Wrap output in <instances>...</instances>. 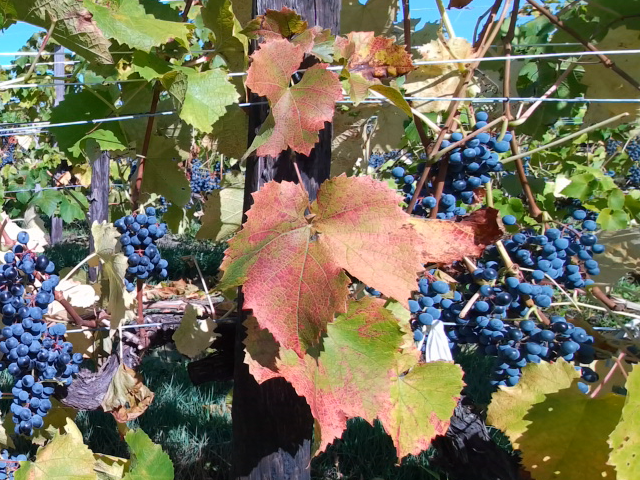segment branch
Segmentation results:
<instances>
[{
    "mask_svg": "<svg viewBox=\"0 0 640 480\" xmlns=\"http://www.w3.org/2000/svg\"><path fill=\"white\" fill-rule=\"evenodd\" d=\"M502 113L506 117L507 129L512 133V137H513V140L510 142L511 152L514 155H517L519 153L518 142L516 141V134H515L514 123H513V114L510 112L509 103H502Z\"/></svg>",
    "mask_w": 640,
    "mask_h": 480,
    "instance_id": "9",
    "label": "branch"
},
{
    "mask_svg": "<svg viewBox=\"0 0 640 480\" xmlns=\"http://www.w3.org/2000/svg\"><path fill=\"white\" fill-rule=\"evenodd\" d=\"M508 6H509V1L508 0H503L502 4H501V8H500V12L496 21L495 26L493 27V30L490 32L488 39L485 43V45L481 48V50L479 51V53L477 54V56H485L486 53L490 50V48L492 47L496 36L498 35V33L500 32V29L503 26L507 11H508Z\"/></svg>",
    "mask_w": 640,
    "mask_h": 480,
    "instance_id": "5",
    "label": "branch"
},
{
    "mask_svg": "<svg viewBox=\"0 0 640 480\" xmlns=\"http://www.w3.org/2000/svg\"><path fill=\"white\" fill-rule=\"evenodd\" d=\"M467 120L469 122V126L474 128L476 126V119L474 117L473 107L471 105H467L465 107Z\"/></svg>",
    "mask_w": 640,
    "mask_h": 480,
    "instance_id": "15",
    "label": "branch"
},
{
    "mask_svg": "<svg viewBox=\"0 0 640 480\" xmlns=\"http://www.w3.org/2000/svg\"><path fill=\"white\" fill-rule=\"evenodd\" d=\"M496 250L499 253L500 257L502 258V260L506 263V265L508 266L509 270L511 271L512 275L518 280V281H522L524 279V276L519 272L518 268L516 267V265L513 263V261L510 259V257L507 255V252L505 251L504 247H503V242L501 240H498L496 242Z\"/></svg>",
    "mask_w": 640,
    "mask_h": 480,
    "instance_id": "10",
    "label": "branch"
},
{
    "mask_svg": "<svg viewBox=\"0 0 640 480\" xmlns=\"http://www.w3.org/2000/svg\"><path fill=\"white\" fill-rule=\"evenodd\" d=\"M459 108V104L455 101H453V104L448 108L447 112L445 113V119L443 121V123L441 124L439 133L436 136L435 142L434 144L430 147L429 151H428V155H427V159L425 161L424 164V169L422 171V174L420 175L417 184L415 186L414 192L411 196V198L409 199L406 208H405V212L407 214H410L414 208V205L416 204L418 198L421 195V191L424 187V184L427 180V178L429 177V173L431 171V166L434 162V158H435V154L437 152V150L441 147V144L443 142V139L447 133V129L450 126L453 116L456 113V111Z\"/></svg>",
    "mask_w": 640,
    "mask_h": 480,
    "instance_id": "1",
    "label": "branch"
},
{
    "mask_svg": "<svg viewBox=\"0 0 640 480\" xmlns=\"http://www.w3.org/2000/svg\"><path fill=\"white\" fill-rule=\"evenodd\" d=\"M599 59L608 67H610L618 76L622 77L623 79L627 80L629 83H631L633 85V87L640 91V83L638 82V80L632 76L630 73L625 72L624 70H622L614 61H612L611 59H609L607 56H605L604 54H601L599 56Z\"/></svg>",
    "mask_w": 640,
    "mask_h": 480,
    "instance_id": "8",
    "label": "branch"
},
{
    "mask_svg": "<svg viewBox=\"0 0 640 480\" xmlns=\"http://www.w3.org/2000/svg\"><path fill=\"white\" fill-rule=\"evenodd\" d=\"M526 2L530 5L536 7V9L552 24L560 27L566 34L573 37L576 41H578L581 45H583L588 51H592L598 49L596 45L591 44L586 38L581 36L577 31L570 28L563 20L556 18L553 16L539 0H526Z\"/></svg>",
    "mask_w": 640,
    "mask_h": 480,
    "instance_id": "3",
    "label": "branch"
},
{
    "mask_svg": "<svg viewBox=\"0 0 640 480\" xmlns=\"http://www.w3.org/2000/svg\"><path fill=\"white\" fill-rule=\"evenodd\" d=\"M160 97H161V89L159 87H156L154 89V95H153L152 103H151V105L149 107V110L151 112L157 110V107L159 106V102H160Z\"/></svg>",
    "mask_w": 640,
    "mask_h": 480,
    "instance_id": "14",
    "label": "branch"
},
{
    "mask_svg": "<svg viewBox=\"0 0 640 480\" xmlns=\"http://www.w3.org/2000/svg\"><path fill=\"white\" fill-rule=\"evenodd\" d=\"M523 301L528 306L529 310L532 313H534L545 326H548L550 324V320L546 317V315L538 307L535 306L534 302L532 301V299L528 295H525L523 297Z\"/></svg>",
    "mask_w": 640,
    "mask_h": 480,
    "instance_id": "13",
    "label": "branch"
},
{
    "mask_svg": "<svg viewBox=\"0 0 640 480\" xmlns=\"http://www.w3.org/2000/svg\"><path fill=\"white\" fill-rule=\"evenodd\" d=\"M516 169H517V172H518L520 185H521L522 189L525 191V194H526V196L528 198L532 213L536 218H540L542 216V213L539 210V207L537 205V201L535 199L534 193H533L532 189L528 185L527 178H526V175H525V170L523 168V161L521 159H518L516 161Z\"/></svg>",
    "mask_w": 640,
    "mask_h": 480,
    "instance_id": "4",
    "label": "branch"
},
{
    "mask_svg": "<svg viewBox=\"0 0 640 480\" xmlns=\"http://www.w3.org/2000/svg\"><path fill=\"white\" fill-rule=\"evenodd\" d=\"M436 7H437V11L439 13V16L441 18V22L443 24L444 29L446 30L448 36L450 38H453L455 36V31L453 30V27L451 26L449 19H448V15L446 13V10L444 8V2L442 0H438L436 2Z\"/></svg>",
    "mask_w": 640,
    "mask_h": 480,
    "instance_id": "11",
    "label": "branch"
},
{
    "mask_svg": "<svg viewBox=\"0 0 640 480\" xmlns=\"http://www.w3.org/2000/svg\"><path fill=\"white\" fill-rule=\"evenodd\" d=\"M153 124H154V118L153 117L147 118L146 129H145L144 138H143L138 165H137V174H136V181L134 185L133 198L131 202V213L133 215H136L138 213V204L140 201L141 188L143 184L145 162H146L147 153H148V149L151 141Z\"/></svg>",
    "mask_w": 640,
    "mask_h": 480,
    "instance_id": "2",
    "label": "branch"
},
{
    "mask_svg": "<svg viewBox=\"0 0 640 480\" xmlns=\"http://www.w3.org/2000/svg\"><path fill=\"white\" fill-rule=\"evenodd\" d=\"M520 4H521V0H514L512 4L510 24L507 31L505 46H504V54L506 56L511 54L512 42H513V38H514L516 26H517V17H518Z\"/></svg>",
    "mask_w": 640,
    "mask_h": 480,
    "instance_id": "6",
    "label": "branch"
},
{
    "mask_svg": "<svg viewBox=\"0 0 640 480\" xmlns=\"http://www.w3.org/2000/svg\"><path fill=\"white\" fill-rule=\"evenodd\" d=\"M54 298L67 310L72 320L79 326L96 327L99 326L97 321L90 319H81L74 307L59 293L54 294Z\"/></svg>",
    "mask_w": 640,
    "mask_h": 480,
    "instance_id": "7",
    "label": "branch"
},
{
    "mask_svg": "<svg viewBox=\"0 0 640 480\" xmlns=\"http://www.w3.org/2000/svg\"><path fill=\"white\" fill-rule=\"evenodd\" d=\"M138 333H139V335L141 337L142 344L144 346H147L149 344V338H148V335H147V332L145 331V329L144 328H139L138 329Z\"/></svg>",
    "mask_w": 640,
    "mask_h": 480,
    "instance_id": "17",
    "label": "branch"
},
{
    "mask_svg": "<svg viewBox=\"0 0 640 480\" xmlns=\"http://www.w3.org/2000/svg\"><path fill=\"white\" fill-rule=\"evenodd\" d=\"M479 67V63L477 61H474L470 68L468 69L467 73L464 75L461 83L459 84L457 90H456V95L457 96H462L464 90L466 89V87L468 86V83L470 82V79L473 77L474 73L476 72L477 68Z\"/></svg>",
    "mask_w": 640,
    "mask_h": 480,
    "instance_id": "12",
    "label": "branch"
},
{
    "mask_svg": "<svg viewBox=\"0 0 640 480\" xmlns=\"http://www.w3.org/2000/svg\"><path fill=\"white\" fill-rule=\"evenodd\" d=\"M194 5V0H187L185 9L183 10L182 14L180 15V19L182 21H186L189 17L190 12L192 11Z\"/></svg>",
    "mask_w": 640,
    "mask_h": 480,
    "instance_id": "16",
    "label": "branch"
}]
</instances>
